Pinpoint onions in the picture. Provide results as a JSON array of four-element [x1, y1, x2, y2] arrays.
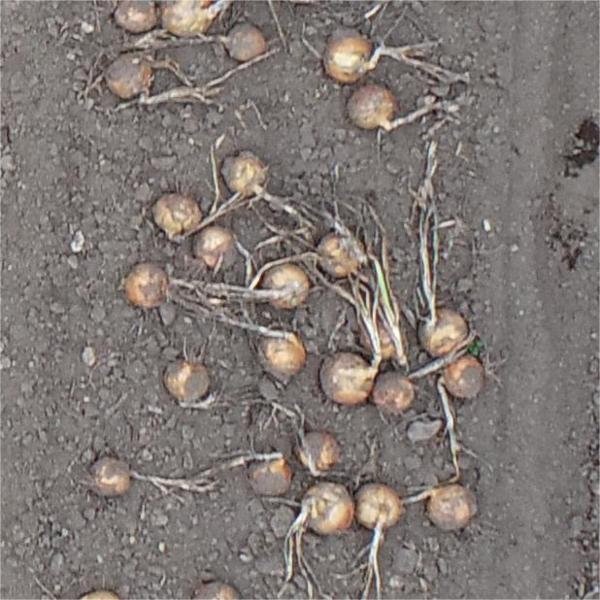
[[195, 225, 233, 268], [88, 454, 128, 495], [427, 483, 474, 529], [224, 153, 268, 195], [422, 309, 467, 354], [153, 192, 200, 236], [299, 430, 342, 474], [360, 330, 399, 360], [161, 0, 210, 35], [322, 351, 375, 405], [191, 580, 239, 600], [442, 356, 483, 396], [113, 0, 155, 32], [226, 23, 265, 61], [107, 51, 151, 97], [347, 83, 393, 129], [318, 232, 360, 275], [302, 482, 352, 532], [323, 31, 373, 82], [120, 262, 169, 308], [80, 587, 120, 600], [163, 358, 207, 400], [261, 262, 306, 307], [257, 329, 303, 375], [372, 372, 414, 416], [356, 484, 402, 527], [248, 455, 288, 497]]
